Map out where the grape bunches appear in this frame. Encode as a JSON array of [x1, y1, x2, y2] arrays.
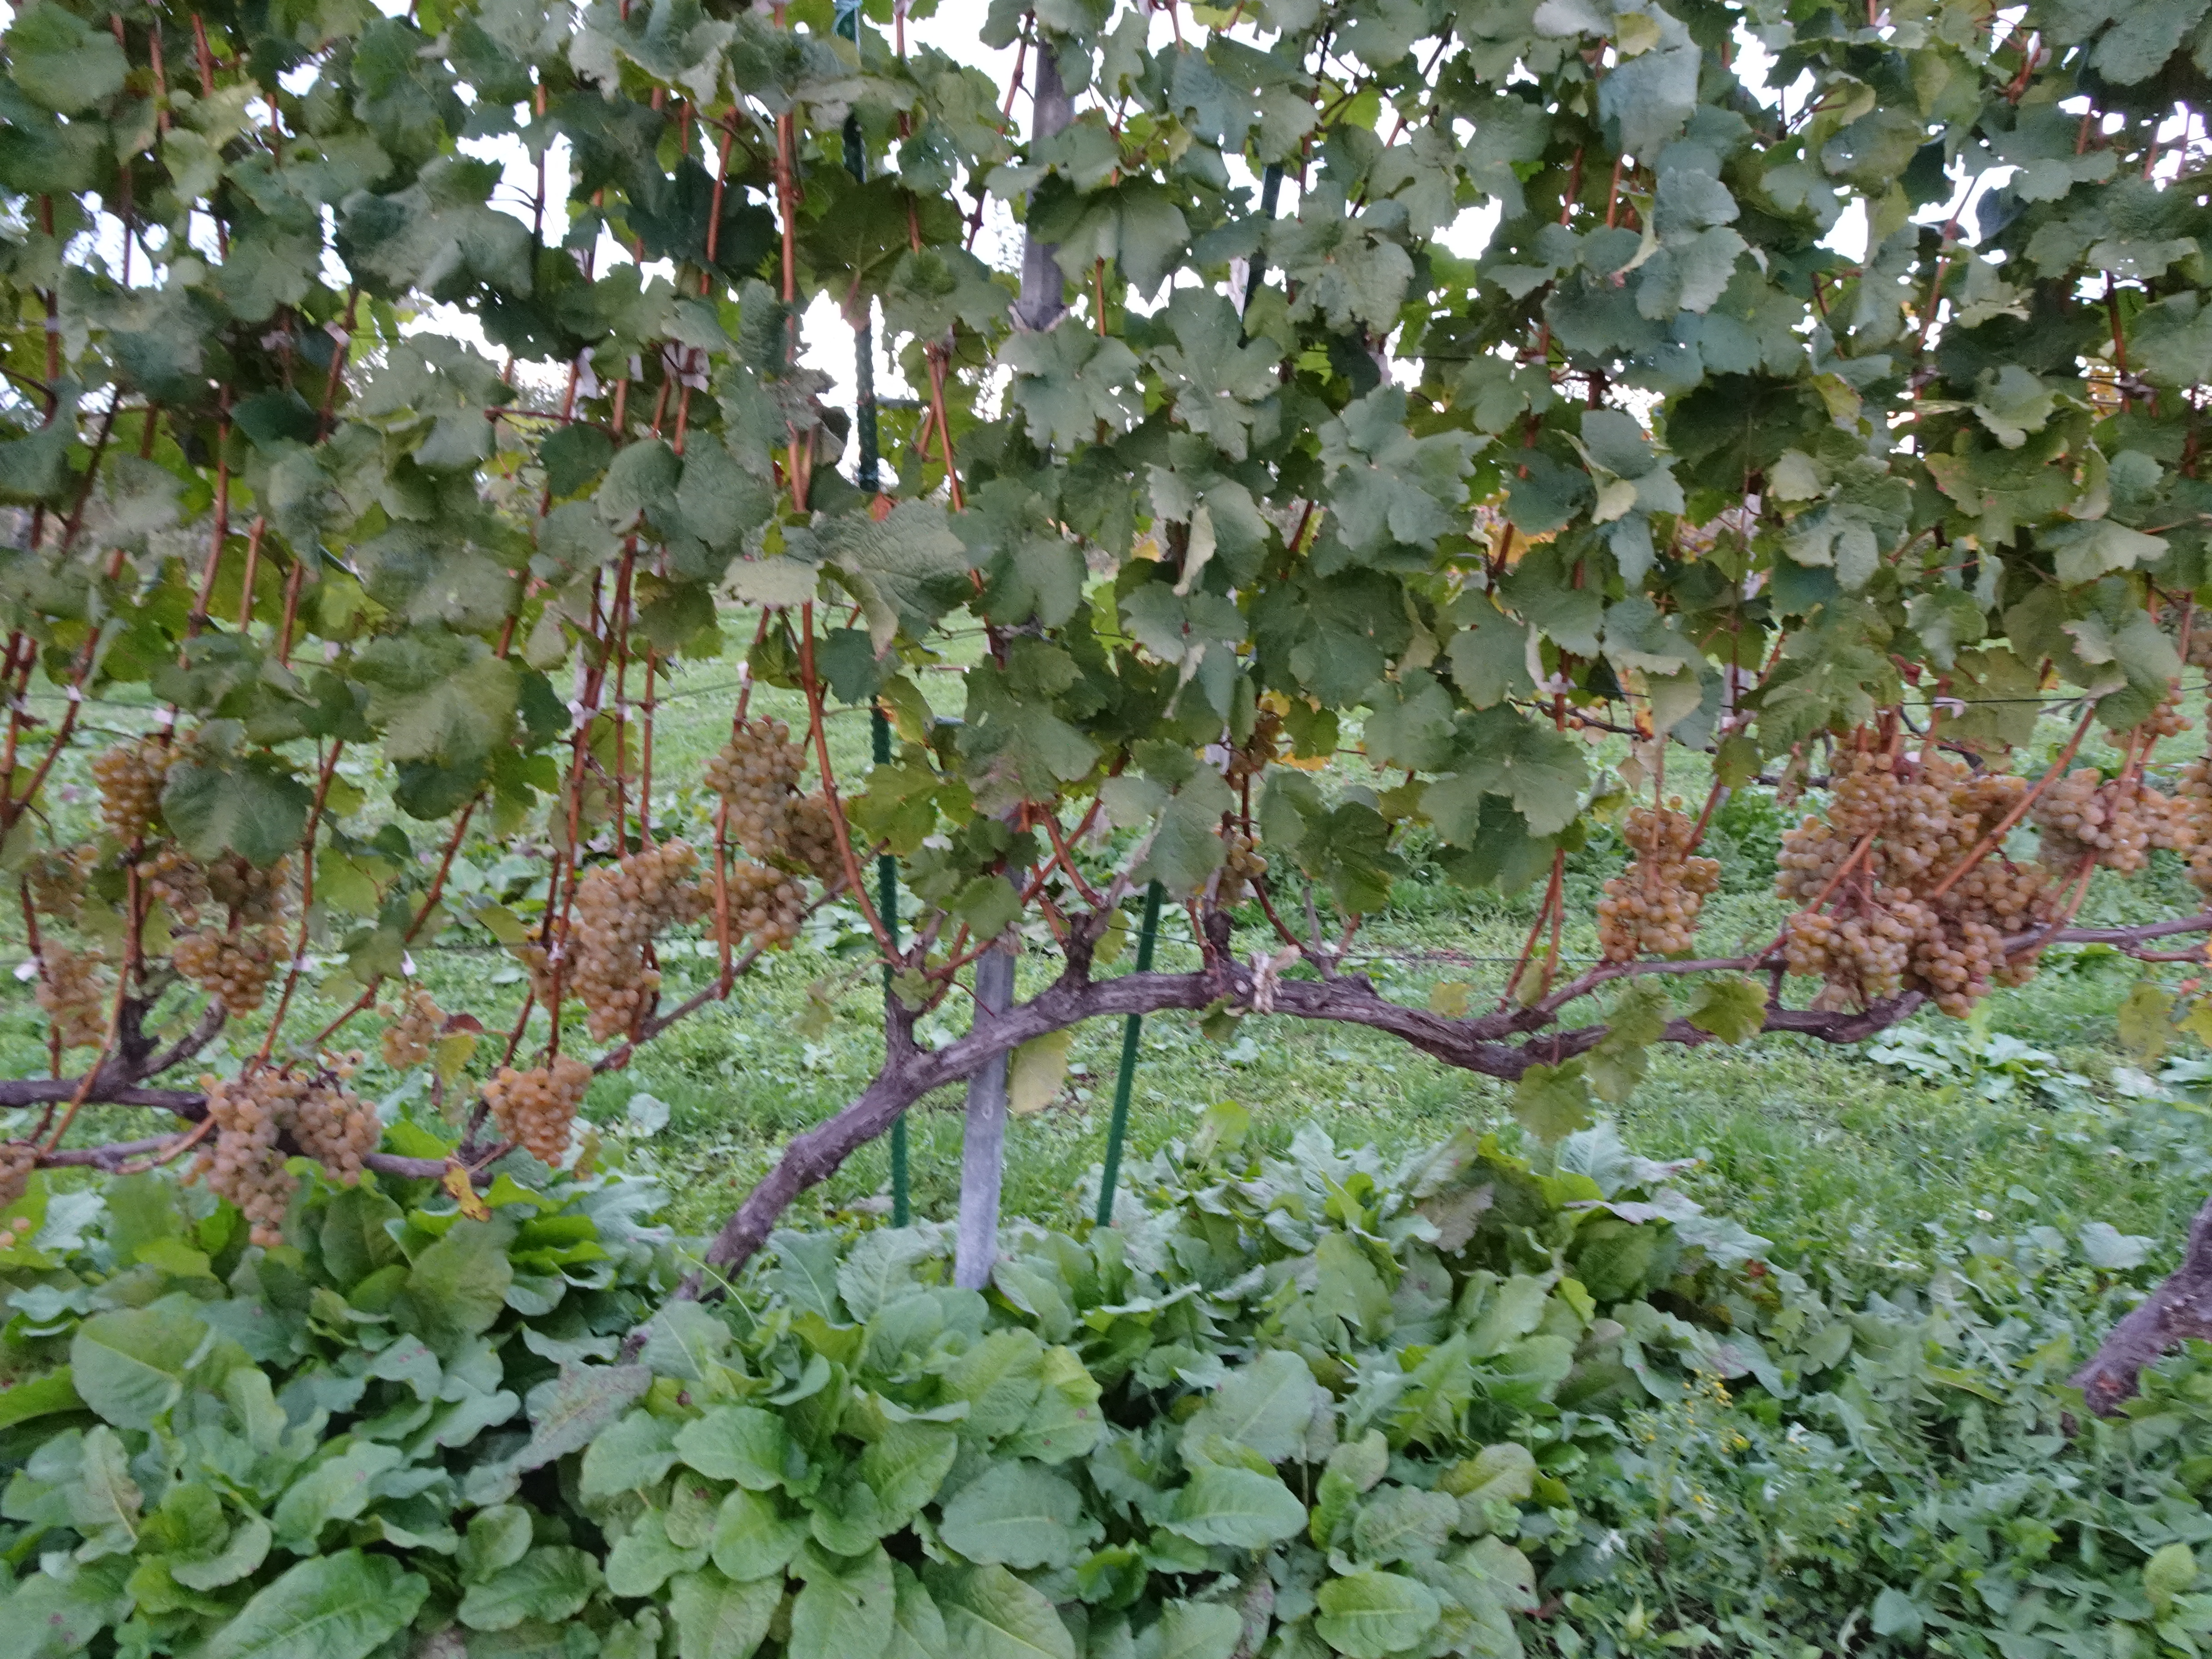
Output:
[[1843, 886, 1938, 1005], [137, 850, 208, 927], [0, 1125, 46, 1258], [2035, 760, 2113, 874], [481, 1051, 592, 1167], [2093, 675, 2196, 743], [1921, 746, 2037, 847], [1835, 752, 1901, 843], [795, 789, 853, 895], [1952, 859, 2043, 993], [181, 1059, 304, 1248], [1211, 818, 1269, 882], [1781, 908, 1850, 1014], [1592, 860, 1702, 967], [209, 846, 302, 959], [571, 865, 662, 1047], [2162, 761, 2212, 901], [33, 937, 114, 1057], [1621, 792, 1698, 864], [513, 918, 579, 1018], [90, 727, 197, 850], [26, 841, 100, 918], [376, 975, 447, 1074], [1769, 812, 1873, 911], [728, 859, 807, 951], [617, 834, 701, 926], [2174, 591, 2212, 668], [174, 925, 274, 1021], [1676, 851, 1733, 894], [2200, 669, 2212, 762], [1912, 914, 1997, 1029], [2094, 779, 2166, 883], [317, 1040, 370, 1081], [696, 866, 731, 949], [1861, 773, 1956, 879], [293, 1088, 384, 1188], [703, 711, 809, 856]]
